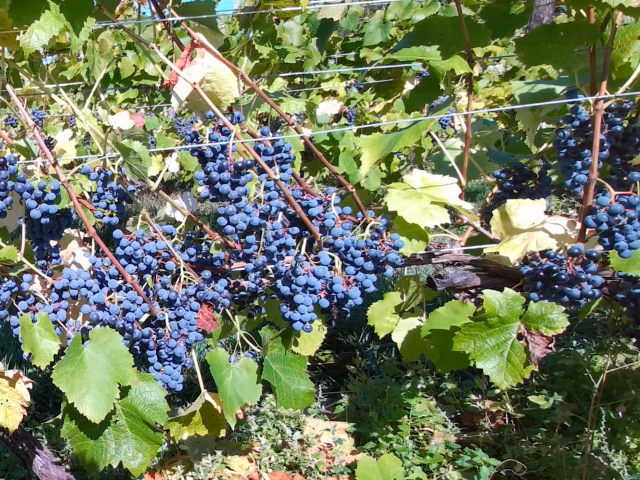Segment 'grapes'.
<instances>
[{
	"instance_id": "dcf779d0",
	"label": "grapes",
	"mask_w": 640,
	"mask_h": 480,
	"mask_svg": "<svg viewBox=\"0 0 640 480\" xmlns=\"http://www.w3.org/2000/svg\"><path fill=\"white\" fill-rule=\"evenodd\" d=\"M156 226L160 229L162 233H165L167 236L171 238H175L178 235V232L173 225L157 224Z\"/></svg>"
},
{
	"instance_id": "83cd7487",
	"label": "grapes",
	"mask_w": 640,
	"mask_h": 480,
	"mask_svg": "<svg viewBox=\"0 0 640 480\" xmlns=\"http://www.w3.org/2000/svg\"><path fill=\"white\" fill-rule=\"evenodd\" d=\"M635 106L634 100L625 101L619 108L617 103H612L604 109L603 122L607 130L600 134L599 160L597 168L604 167V161L611 168L609 174L615 176L618 169L627 170V162H631L640 153V127L637 116L628 119L626 128L622 126L625 114Z\"/></svg>"
},
{
	"instance_id": "0513c4c2",
	"label": "grapes",
	"mask_w": 640,
	"mask_h": 480,
	"mask_svg": "<svg viewBox=\"0 0 640 480\" xmlns=\"http://www.w3.org/2000/svg\"><path fill=\"white\" fill-rule=\"evenodd\" d=\"M17 158L12 154L0 157V219H6L8 212L5 210L13 204V197L9 195V191H14L21 198L19 203L24 205L25 215L17 218V223L22 225L25 222L26 236L32 241L33 258L36 260L38 270L48 277L54 275L52 269L46 268L48 263L51 266H58L63 262L60 256L62 246L56 244L52 247L49 243L51 240L59 241L64 237L66 229H72L75 226L77 214L73 212L71 207L59 208L55 201L61 193V183L54 180L49 184L40 180L35 189L33 183H28V177L25 173L16 175V183L9 179V175H15L18 167L15 165Z\"/></svg>"
},
{
	"instance_id": "012428b0",
	"label": "grapes",
	"mask_w": 640,
	"mask_h": 480,
	"mask_svg": "<svg viewBox=\"0 0 640 480\" xmlns=\"http://www.w3.org/2000/svg\"><path fill=\"white\" fill-rule=\"evenodd\" d=\"M617 276H618L620 279H623V280H625V281L633 282L634 284H637V283L639 282V278H638L637 276H635V275H633V274H627V273H625V272H623V271H619V272L617 273Z\"/></svg>"
},
{
	"instance_id": "b958b902",
	"label": "grapes",
	"mask_w": 640,
	"mask_h": 480,
	"mask_svg": "<svg viewBox=\"0 0 640 480\" xmlns=\"http://www.w3.org/2000/svg\"><path fill=\"white\" fill-rule=\"evenodd\" d=\"M88 263L93 266V275L96 278L92 280V274L89 270L80 268H63L61 270V279L53 282V287L49 293L51 305L42 302H35L36 294H27L29 292V284L33 282V275L25 273L22 275V282L14 279H6L5 282L0 279V330L3 329V322L8 319L10 325L9 331L12 336L19 335L22 329L20 317L23 316L22 311H26L30 306L35 309L34 312L28 311L27 315L31 318V323H37V316L40 313L49 314V320L56 323L58 319L65 322V328L68 329L65 334V343L70 345L75 333L85 336L90 333L100 322L107 325H113L117 330H124L121 337L123 345H129L132 339L133 352L137 355L142 353L141 344H148V350L145 352L147 361L153 365L148 367L151 373H156L153 379L161 382L163 388L172 389L174 392L183 390L184 376L181 374L183 369L190 368L193 360L187 356L186 350L193 342H203L205 336L197 330V311L200 310V303L210 301L212 304L217 303L216 311L220 312L223 307H230L231 301L228 297L230 292L226 290L229 284L227 278H221L216 281L212 278L213 271L203 269L200 272L202 280L196 285L195 282L187 283L186 288L182 289V295L177 290H172L170 273L160 274L159 283L154 284V290L145 287L143 291L149 298L155 293L160 301L153 300L152 303L156 308L162 305L169 310L170 320L168 328L170 330V338L166 331L161 327L153 329L146 326L143 329L137 328L138 320L145 314L150 313L147 304L143 302V298L138 295L134 288L128 284H119L115 278L119 275L118 271L112 265L108 258H100L90 255L88 252L83 254ZM114 290L118 296L126 297L117 300L118 305L112 302L107 304L106 292L111 294ZM17 294L18 307L20 310L15 315L9 316V311L3 305H8L12 294ZM82 298L89 299V304H83L80 311L83 315H89L92 324L80 327L79 320H67L66 309L70 307V302L78 301Z\"/></svg>"
},
{
	"instance_id": "ef6de9ee",
	"label": "grapes",
	"mask_w": 640,
	"mask_h": 480,
	"mask_svg": "<svg viewBox=\"0 0 640 480\" xmlns=\"http://www.w3.org/2000/svg\"><path fill=\"white\" fill-rule=\"evenodd\" d=\"M551 169L550 163H545L541 166V170L538 171V180L541 182L539 187L528 188L524 184L528 180H536L537 174L532 172L528 168L524 167V164L520 161H514L512 163V170L517 173L512 175V180L508 179L511 174L510 169H503L501 171L496 170L493 172V176L498 180L504 181L500 186V189L496 191V196L500 197L501 201L505 199H546L551 192V178L547 176V171Z\"/></svg>"
},
{
	"instance_id": "01657485",
	"label": "grapes",
	"mask_w": 640,
	"mask_h": 480,
	"mask_svg": "<svg viewBox=\"0 0 640 480\" xmlns=\"http://www.w3.org/2000/svg\"><path fill=\"white\" fill-rule=\"evenodd\" d=\"M269 147H265L263 142L255 143L253 149L260 155L261 159L272 169L274 173L280 175V180L292 194L295 201L302 208L309 218L321 217L322 220L312 219L325 242L323 250L317 253L319 264H310L307 256L296 253V241L293 236H308L310 231L305 222L302 221L292 206H288L289 200L276 185L275 181L265 183L262 205H249L242 197L249 195L251 189L247 183L255 179V173L248 171L252 167H257L259 183H262L270 175L258 164L255 159H244L236 161L234 157L229 160L228 144L224 146L209 147L203 149L190 150L192 157H197L203 171L194 174L199 187L204 186L200 192L203 200L210 202H228L233 200V205L219 206L216 208L218 215L217 225L222 227L220 233L225 236H232V239L239 242L241 235L249 228H266L261 234V248L265 251L258 259L253 253L259 250L258 236L247 235L245 237L243 251L232 249L226 245L225 250L231 251V263L245 261V271L248 273L250 285L247 291L238 292L234 299V304L238 305L237 312H244L246 299L248 306H254L248 311V318L254 319L257 313L264 315L266 309L263 306L255 305V300L260 295L261 301H267L269 295L264 293L263 274L267 271L266 264L271 265L276 278V284L271 285L269 290L274 292L270 295L272 300H280L279 311L282 313L281 320L289 322L291 328L296 332L311 333L314 322L318 319L315 312V303L324 310H330L331 304H336L339 310V317L349 320L352 317V308L364 303L363 291L365 294H377L379 287L375 282L379 277L373 273L383 272L386 277L395 275V268L404 265V258L398 256L400 249L405 247V242L401 240L398 233L388 235L389 242L384 241L383 245L390 249L391 253L379 250L381 245L378 240L382 239L381 233H387L391 226L389 215L378 217L376 231L370 234L369 239L359 240L356 236H351L354 229L353 221H345L340 224L341 228H333L337 222V217L331 207V200L323 201L322 197L307 196L303 198V190L296 184L291 188L287 181L291 179L296 156L293 153V145L283 140L270 141ZM279 212L284 213L289 221L288 234L282 228L280 222L270 223L269 220H277ZM335 256L341 257L347 275L355 276L356 287L348 289L341 277H334L329 274V267L334 262ZM289 269L284 261L285 257L293 256Z\"/></svg>"
},
{
	"instance_id": "f8a65327",
	"label": "grapes",
	"mask_w": 640,
	"mask_h": 480,
	"mask_svg": "<svg viewBox=\"0 0 640 480\" xmlns=\"http://www.w3.org/2000/svg\"><path fill=\"white\" fill-rule=\"evenodd\" d=\"M599 207L591 208L585 217V226L596 229L597 243L605 250L615 249L622 259L634 256L640 249V195H617L611 204V191L604 187L594 190Z\"/></svg>"
},
{
	"instance_id": "84f90ec7",
	"label": "grapes",
	"mask_w": 640,
	"mask_h": 480,
	"mask_svg": "<svg viewBox=\"0 0 640 480\" xmlns=\"http://www.w3.org/2000/svg\"><path fill=\"white\" fill-rule=\"evenodd\" d=\"M583 253L586 259L573 268V274L567 267V257L552 250L544 252L545 259L549 261L544 265L537 260H522L518 268L526 282L522 290L530 292L529 297L534 303L552 302L563 307L575 305L582 308L587 299L600 298L602 292L594 289L604 283L595 262L600 258L599 253L580 243L567 250L570 258L580 257Z\"/></svg>"
},
{
	"instance_id": "802abce8",
	"label": "grapes",
	"mask_w": 640,
	"mask_h": 480,
	"mask_svg": "<svg viewBox=\"0 0 640 480\" xmlns=\"http://www.w3.org/2000/svg\"><path fill=\"white\" fill-rule=\"evenodd\" d=\"M228 120L230 121V123L232 125H237L240 122H244L245 121V116L243 115V113L241 111H234L233 114H228L227 115Z\"/></svg>"
},
{
	"instance_id": "e5b3c951",
	"label": "grapes",
	"mask_w": 640,
	"mask_h": 480,
	"mask_svg": "<svg viewBox=\"0 0 640 480\" xmlns=\"http://www.w3.org/2000/svg\"><path fill=\"white\" fill-rule=\"evenodd\" d=\"M112 239L118 241L114 255L127 273L139 281L141 286H144L146 280L158 269L159 263L156 258L158 253H161V259L167 271H174L177 268V265L170 260L173 256L160 239L151 240L149 243L132 240L130 237H125L124 231L120 228L112 232Z\"/></svg>"
},
{
	"instance_id": "1ff8f66d",
	"label": "grapes",
	"mask_w": 640,
	"mask_h": 480,
	"mask_svg": "<svg viewBox=\"0 0 640 480\" xmlns=\"http://www.w3.org/2000/svg\"><path fill=\"white\" fill-rule=\"evenodd\" d=\"M195 238V231L189 230L186 233V238L184 239V244L187 246L186 252L185 246L180 244H173L172 246L175 248V251L185 262L194 263L197 265H205L212 267H220L225 264V253L218 252L217 257L209 251L210 242L206 241L205 246L203 247L201 244H193L190 240Z\"/></svg>"
},
{
	"instance_id": "5460f4e3",
	"label": "grapes",
	"mask_w": 640,
	"mask_h": 480,
	"mask_svg": "<svg viewBox=\"0 0 640 480\" xmlns=\"http://www.w3.org/2000/svg\"><path fill=\"white\" fill-rule=\"evenodd\" d=\"M582 102H567L571 106V115H565L563 122L565 124H572V128L576 129L573 132V137L579 136L586 139H591L593 136V125L590 123V112L588 110L583 111L582 105H577ZM556 136L559 139L553 141V147L557 152V160L560 165V171L564 173L566 179L564 180V186L566 188H572L574 193H583L585 185L589 180V169L592 166V151L590 148H580L577 146V141L571 138V132L565 128H558L556 130Z\"/></svg>"
},
{
	"instance_id": "54f908b8",
	"label": "grapes",
	"mask_w": 640,
	"mask_h": 480,
	"mask_svg": "<svg viewBox=\"0 0 640 480\" xmlns=\"http://www.w3.org/2000/svg\"><path fill=\"white\" fill-rule=\"evenodd\" d=\"M611 298L620 302L622 306L628 305L626 315L640 325V289L629 282H623L619 293H613Z\"/></svg>"
},
{
	"instance_id": "2adb6a1f",
	"label": "grapes",
	"mask_w": 640,
	"mask_h": 480,
	"mask_svg": "<svg viewBox=\"0 0 640 480\" xmlns=\"http://www.w3.org/2000/svg\"><path fill=\"white\" fill-rule=\"evenodd\" d=\"M79 172L82 176H88L91 181H96L98 185L96 193L91 198L92 206L116 212L115 216H110L109 214L104 216L102 211H95L93 216L96 219H102L105 225H117L119 220H124L126 218V207L122 202L125 201L128 205H131L133 200L127 195L121 184L116 182L108 183L107 180L112 177L111 171L102 168L100 171L93 172L90 165H83Z\"/></svg>"
},
{
	"instance_id": "91a60905",
	"label": "grapes",
	"mask_w": 640,
	"mask_h": 480,
	"mask_svg": "<svg viewBox=\"0 0 640 480\" xmlns=\"http://www.w3.org/2000/svg\"><path fill=\"white\" fill-rule=\"evenodd\" d=\"M209 141H222L224 139L231 140V131L226 127L222 126L219 129H215L208 135Z\"/></svg>"
}]
</instances>
